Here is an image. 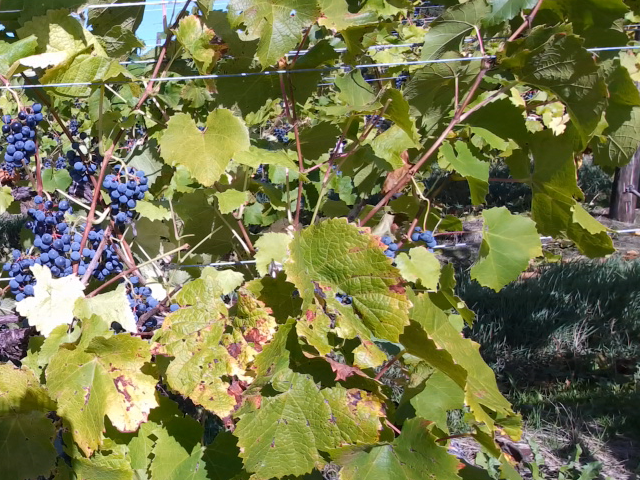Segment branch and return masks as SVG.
I'll use <instances>...</instances> for the list:
<instances>
[{
  "label": "branch",
  "mask_w": 640,
  "mask_h": 480,
  "mask_svg": "<svg viewBox=\"0 0 640 480\" xmlns=\"http://www.w3.org/2000/svg\"><path fill=\"white\" fill-rule=\"evenodd\" d=\"M35 164H36V171H37V175H36L37 194L38 195H42L43 194L41 192V189H42V181H41L42 169H41V161H40V154L39 153L35 154Z\"/></svg>",
  "instance_id": "1d269e1b"
},
{
  "label": "branch",
  "mask_w": 640,
  "mask_h": 480,
  "mask_svg": "<svg viewBox=\"0 0 640 480\" xmlns=\"http://www.w3.org/2000/svg\"><path fill=\"white\" fill-rule=\"evenodd\" d=\"M152 93H153V85L148 84L144 94L141 96V99L136 102L134 109L138 110L140 106L146 101V99L151 96Z\"/></svg>",
  "instance_id": "2b1400db"
},
{
  "label": "branch",
  "mask_w": 640,
  "mask_h": 480,
  "mask_svg": "<svg viewBox=\"0 0 640 480\" xmlns=\"http://www.w3.org/2000/svg\"><path fill=\"white\" fill-rule=\"evenodd\" d=\"M172 36H173V33H172V32H169V33L167 34L166 39H165V40H164V42H163V48H162L161 52L159 53V55H158V57H157V60H156V66H155V68H154V70H153V72H152V74H151V77H152V78H156V77H157V74H158V73H159V71H160L161 63H162V59H163V57L165 56V54L167 53V51H168V45H169V43H170V41H171V39H172Z\"/></svg>",
  "instance_id": "ea751061"
},
{
  "label": "branch",
  "mask_w": 640,
  "mask_h": 480,
  "mask_svg": "<svg viewBox=\"0 0 640 480\" xmlns=\"http://www.w3.org/2000/svg\"><path fill=\"white\" fill-rule=\"evenodd\" d=\"M302 188H303V181L299 180L298 181V186H297V203H296L295 213H294V225L295 226L299 225L300 209H301V205H302Z\"/></svg>",
  "instance_id": "ca6c30ca"
},
{
  "label": "branch",
  "mask_w": 640,
  "mask_h": 480,
  "mask_svg": "<svg viewBox=\"0 0 640 480\" xmlns=\"http://www.w3.org/2000/svg\"><path fill=\"white\" fill-rule=\"evenodd\" d=\"M543 2V0H536L531 13L525 18V20L522 22V25H520L515 31H513L509 37L508 40L512 41L518 34H520L529 24V22L531 21V19H533L536 16V13L540 7V4Z\"/></svg>",
  "instance_id": "1ff4a987"
},
{
  "label": "branch",
  "mask_w": 640,
  "mask_h": 480,
  "mask_svg": "<svg viewBox=\"0 0 640 480\" xmlns=\"http://www.w3.org/2000/svg\"><path fill=\"white\" fill-rule=\"evenodd\" d=\"M34 92L36 93L37 96H39L42 99V101L50 109V112L54 116V119H55L56 123L62 128L63 133L66 136L67 140L70 143H73L74 142V138L69 133L67 125L61 120L60 116L58 115L57 110L55 109L53 104L50 102V100L38 88H35Z\"/></svg>",
  "instance_id": "982ccf7c"
},
{
  "label": "branch",
  "mask_w": 640,
  "mask_h": 480,
  "mask_svg": "<svg viewBox=\"0 0 640 480\" xmlns=\"http://www.w3.org/2000/svg\"><path fill=\"white\" fill-rule=\"evenodd\" d=\"M494 63V60H488L487 63L484 65V67L481 69V71L478 73L476 80L473 84V86L470 88L469 92L467 93V96L464 98V100L462 101L459 109L457 110V112L453 115L452 120L450 125L447 127V129L440 135V137L438 139L435 140L434 144L432 146H430L422 155V157H419L415 166L413 167V169H411L406 175L403 176V178L401 180H399L397 182L396 185H394L392 187V189L389 190V192L384 195L376 204L375 206L371 209V211L367 214V216L365 218H362L359 223L358 226L359 227H363L365 223L369 222L370 219L374 216V214L379 210V208L388 200L391 198V196L393 194L396 193V191L398 189H400L402 187V185L409 180L415 173L418 172L419 168L421 167L422 163L424 161L427 160V158L429 157V155L438 148V146L440 145V143L443 142V140L451 133V131L454 129L458 118L460 117V115L463 113L467 103L469 102V100L472 98V96L474 95L475 91L478 89L480 82L483 78V76L485 75V73L488 71V69L492 66V64Z\"/></svg>",
  "instance_id": "30e6481e"
},
{
  "label": "branch",
  "mask_w": 640,
  "mask_h": 480,
  "mask_svg": "<svg viewBox=\"0 0 640 480\" xmlns=\"http://www.w3.org/2000/svg\"><path fill=\"white\" fill-rule=\"evenodd\" d=\"M108 222H109V224L112 226V228H113V230L115 231L116 235H117L119 238H122V237H123V234H122V232L120 231V229H119V227H118L117 223L113 220V217H112V216H109V217H108Z\"/></svg>",
  "instance_id": "8bde2521"
},
{
  "label": "branch",
  "mask_w": 640,
  "mask_h": 480,
  "mask_svg": "<svg viewBox=\"0 0 640 480\" xmlns=\"http://www.w3.org/2000/svg\"><path fill=\"white\" fill-rule=\"evenodd\" d=\"M193 0H187L186 3L183 5V7L180 9V12L178 14V17L175 21L174 24L171 25V29L175 30L182 22L183 20V16L185 15V11L189 8V6L192 4Z\"/></svg>",
  "instance_id": "1af6ec82"
},
{
  "label": "branch",
  "mask_w": 640,
  "mask_h": 480,
  "mask_svg": "<svg viewBox=\"0 0 640 480\" xmlns=\"http://www.w3.org/2000/svg\"><path fill=\"white\" fill-rule=\"evenodd\" d=\"M288 88L290 93V106H291V119H292V129L294 132V138L296 141V151H297V161L299 164V169L301 171L305 170V164L302 158V148H301V139L299 135V130L297 126V117H296V104H295V90L293 85V79L291 75L287 76Z\"/></svg>",
  "instance_id": "45aa463d"
},
{
  "label": "branch",
  "mask_w": 640,
  "mask_h": 480,
  "mask_svg": "<svg viewBox=\"0 0 640 480\" xmlns=\"http://www.w3.org/2000/svg\"><path fill=\"white\" fill-rule=\"evenodd\" d=\"M124 131L123 130H119L118 134L115 136L113 142L111 143V145L109 146L108 150L106 151V155H105V159L104 162L102 164L101 167V172L99 173L98 179L96 180L93 174L89 175V179L91 181V183L94 185V192L92 193V197H91V208H90V212L88 214V217L86 218L87 221V227L85 229V231L83 232V237H82V241L80 244L81 248H84L87 244V239H88V235L92 230V226H93V217L96 211V205H97V201L99 202L100 206L102 208L106 207V202L103 199L102 193L99 190L100 186L103 182V178L105 176L106 173V169L108 167V164L111 160V155L113 150L116 148L119 140L123 137Z\"/></svg>",
  "instance_id": "325d2c04"
},
{
  "label": "branch",
  "mask_w": 640,
  "mask_h": 480,
  "mask_svg": "<svg viewBox=\"0 0 640 480\" xmlns=\"http://www.w3.org/2000/svg\"><path fill=\"white\" fill-rule=\"evenodd\" d=\"M121 243L123 244V247H124V249H125V251H126V253H127L128 257H129L130 263H131V265L133 267L129 268V269H125L124 271H122V272L116 274L115 276L107 279L103 283L102 286L98 287L97 289L93 290L92 292H89L87 294L88 298H92V297L98 295L99 293L103 292L111 283L116 282L117 280L125 277L128 274H132V273L136 272L138 269H141V268H144L146 266H149V265H151L152 263H155V262L164 261L167 258H169V257L173 256L174 254L178 253L179 251H182L184 249H188L189 248V244L185 243V244H182V245H179V246L175 247L174 249L170 250L169 252L163 254L162 256L153 257V258H150V259H148V260H146L144 262L136 264V260L134 258V254L132 253V251H131V249L129 247L128 241L126 239H122Z\"/></svg>",
  "instance_id": "170604dd"
}]
</instances>
